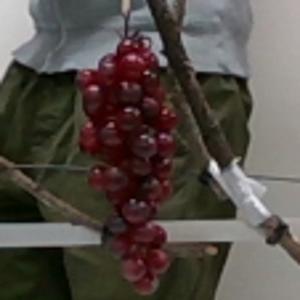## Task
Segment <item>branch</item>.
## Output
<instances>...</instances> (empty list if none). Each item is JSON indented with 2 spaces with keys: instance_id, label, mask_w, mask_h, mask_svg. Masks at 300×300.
<instances>
[{
  "instance_id": "branch-1",
  "label": "branch",
  "mask_w": 300,
  "mask_h": 300,
  "mask_svg": "<svg viewBox=\"0 0 300 300\" xmlns=\"http://www.w3.org/2000/svg\"><path fill=\"white\" fill-rule=\"evenodd\" d=\"M144 1L161 41L158 53L166 59L168 74L200 153L222 191L266 246L277 245L300 266V240L291 231V225L266 204L268 186L241 169L207 101L182 38L187 0ZM229 185L231 186L232 190L238 195V197L243 201L244 205L247 207L249 213L253 216V219L257 222V224L251 219V217L248 215V213L245 211V209L242 207L240 202L237 200V198L234 196V194L231 192V189L229 188Z\"/></svg>"
},
{
  "instance_id": "branch-3",
  "label": "branch",
  "mask_w": 300,
  "mask_h": 300,
  "mask_svg": "<svg viewBox=\"0 0 300 300\" xmlns=\"http://www.w3.org/2000/svg\"><path fill=\"white\" fill-rule=\"evenodd\" d=\"M169 255H185V256H214L218 255L219 248L211 244H201L198 246H184L169 243L164 248Z\"/></svg>"
},
{
  "instance_id": "branch-2",
  "label": "branch",
  "mask_w": 300,
  "mask_h": 300,
  "mask_svg": "<svg viewBox=\"0 0 300 300\" xmlns=\"http://www.w3.org/2000/svg\"><path fill=\"white\" fill-rule=\"evenodd\" d=\"M0 168L14 181L15 184L59 212V214L71 221L73 226L84 227L93 233L103 234L104 222L93 219L78 208L58 199L51 192L45 190L44 187L36 183L32 178L26 176L25 173H22L14 163L4 158L1 152Z\"/></svg>"
}]
</instances>
